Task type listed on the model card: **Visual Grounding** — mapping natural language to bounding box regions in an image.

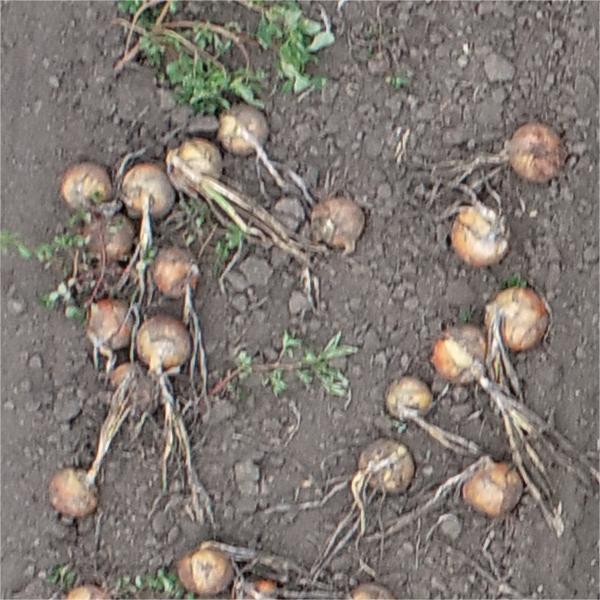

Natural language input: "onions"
[351,582,395,599]
[310,198,361,248]
[356,439,411,491]
[60,163,110,212]
[103,362,145,385]
[90,217,133,261]
[307,27,334,50]
[47,468,96,518]
[446,205,507,265]
[385,375,432,418]
[462,461,520,514]
[83,299,134,357]
[244,575,279,597]
[430,328,482,381]
[508,123,562,181]
[130,315,190,371]
[119,166,174,214]
[175,137,221,179]
[149,247,197,294]
[174,546,233,597]
[67,580,110,599]
[217,104,265,154]
[485,288,547,350]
